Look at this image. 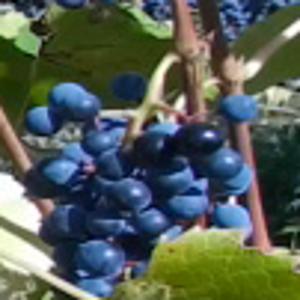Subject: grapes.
Here are the masks:
<instances>
[{
    "instance_id": "1",
    "label": "grapes",
    "mask_w": 300,
    "mask_h": 300,
    "mask_svg": "<svg viewBox=\"0 0 300 300\" xmlns=\"http://www.w3.org/2000/svg\"><path fill=\"white\" fill-rule=\"evenodd\" d=\"M48 103L21 118L30 137L59 134L65 120H81L78 143L67 141L58 156L46 157L28 174V188L40 199L58 200L41 224L52 243L56 266L70 269L80 289L108 299L124 278L129 253L117 238L163 235L176 241L180 221L195 222L209 210L214 185L228 197L244 198L254 180L245 157L224 148L212 126L159 121L132 131L125 118L103 117L102 97L82 83L52 82Z\"/></svg>"
},
{
    "instance_id": "2",
    "label": "grapes",
    "mask_w": 300,
    "mask_h": 300,
    "mask_svg": "<svg viewBox=\"0 0 300 300\" xmlns=\"http://www.w3.org/2000/svg\"><path fill=\"white\" fill-rule=\"evenodd\" d=\"M219 112L229 121L251 123L258 115V105L248 94H226L220 100Z\"/></svg>"
},
{
    "instance_id": "3",
    "label": "grapes",
    "mask_w": 300,
    "mask_h": 300,
    "mask_svg": "<svg viewBox=\"0 0 300 300\" xmlns=\"http://www.w3.org/2000/svg\"><path fill=\"white\" fill-rule=\"evenodd\" d=\"M211 220L220 229L245 231L251 225L249 211L235 203L215 206L211 211Z\"/></svg>"
},
{
    "instance_id": "4",
    "label": "grapes",
    "mask_w": 300,
    "mask_h": 300,
    "mask_svg": "<svg viewBox=\"0 0 300 300\" xmlns=\"http://www.w3.org/2000/svg\"><path fill=\"white\" fill-rule=\"evenodd\" d=\"M145 82L135 71H123L110 81L112 94L121 101H138L144 95Z\"/></svg>"
}]
</instances>
